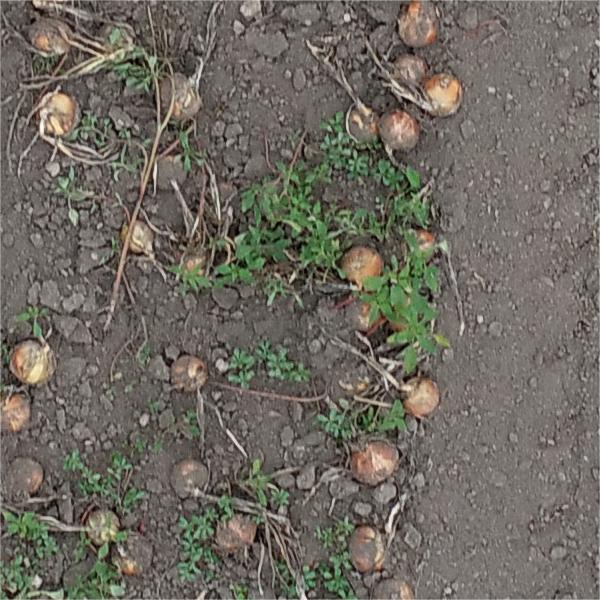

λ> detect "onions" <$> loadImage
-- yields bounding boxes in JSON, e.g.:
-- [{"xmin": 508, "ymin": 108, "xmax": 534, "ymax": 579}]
[
  {"xmin": 354, "ymin": 299, "xmax": 384, "ymax": 330},
  {"xmin": 124, "ymin": 222, "xmax": 153, "ymax": 252},
  {"xmin": 1, "ymin": 393, "xmax": 31, "ymax": 429},
  {"xmin": 5, "ymin": 457, "xmax": 44, "ymax": 498},
  {"xmin": 87, "ymin": 510, "xmax": 119, "ymax": 542},
  {"xmin": 33, "ymin": 93, "xmax": 73, "ymax": 135},
  {"xmin": 395, "ymin": 4, "xmax": 439, "ymax": 46},
  {"xmin": 346, "ymin": 526, "xmax": 382, "ymax": 568},
  {"xmin": 373, "ymin": 575, "xmax": 413, "ymax": 599},
  {"xmin": 421, "ymin": 73, "xmax": 461, "ymax": 114},
  {"xmin": 393, "ymin": 50, "xmax": 426, "ymax": 84},
  {"xmin": 347, "ymin": 438, "xmax": 398, "ymax": 483},
  {"xmin": 407, "ymin": 228, "xmax": 436, "ymax": 261},
  {"xmin": 384, "ymin": 316, "xmax": 408, "ymax": 335},
  {"xmin": 93, "ymin": 19, "xmax": 135, "ymax": 61},
  {"xmin": 9, "ymin": 340, "xmax": 55, "ymax": 383},
  {"xmin": 215, "ymin": 513, "xmax": 253, "ymax": 553},
  {"xmin": 116, "ymin": 532, "xmax": 151, "ymax": 575},
  {"xmin": 162, "ymin": 78, "xmax": 199, "ymax": 118},
  {"xmin": 336, "ymin": 243, "xmax": 384, "ymax": 286},
  {"xmin": 173, "ymin": 354, "xmax": 205, "ymax": 386},
  {"xmin": 345, "ymin": 105, "xmax": 378, "ymax": 141},
  {"xmin": 30, "ymin": 17, "xmax": 65, "ymax": 58},
  {"xmin": 168, "ymin": 457, "xmax": 208, "ymax": 496},
  {"xmin": 179, "ymin": 247, "xmax": 208, "ymax": 279},
  {"xmin": 399, "ymin": 376, "xmax": 439, "ymax": 414},
  {"xmin": 378, "ymin": 108, "xmax": 418, "ymax": 149}
]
